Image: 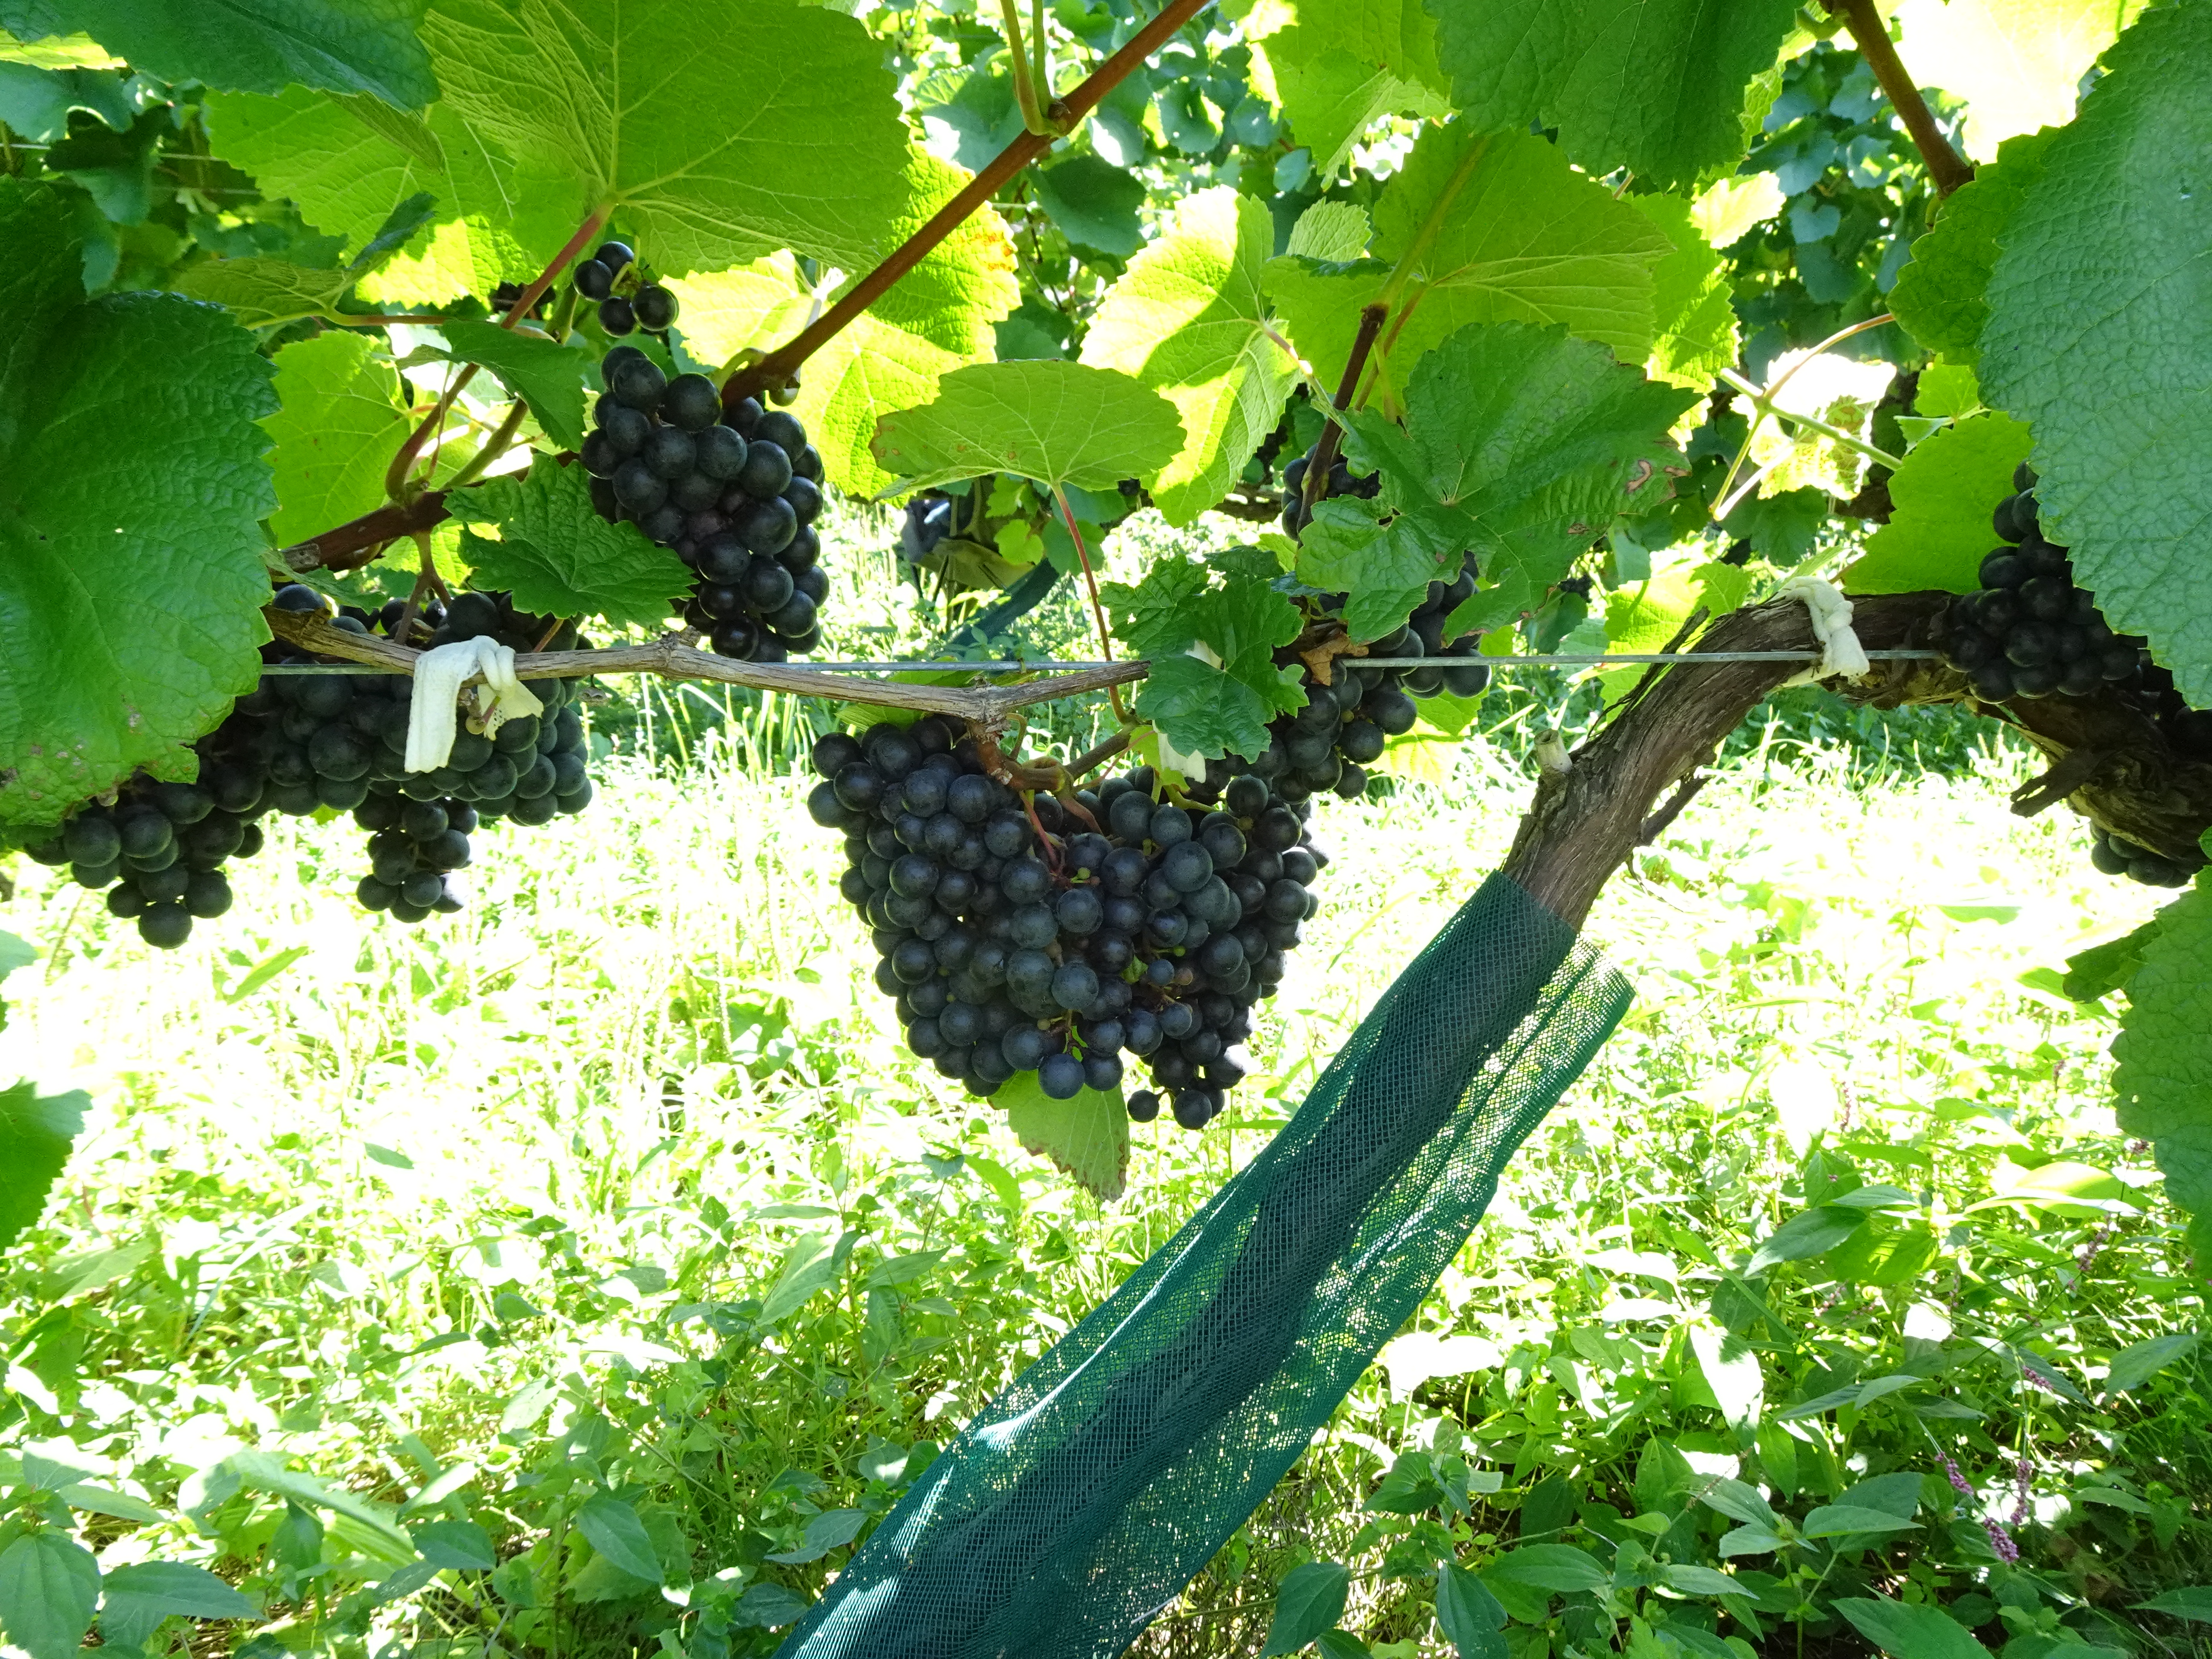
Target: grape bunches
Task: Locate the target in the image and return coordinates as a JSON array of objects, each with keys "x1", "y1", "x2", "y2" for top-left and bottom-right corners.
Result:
[
  {"x1": 1128, "y1": 775, "x2": 1329, "y2": 1128},
  {"x1": 1281, "y1": 443, "x2": 1382, "y2": 541},
  {"x1": 21, "y1": 732, "x2": 265, "y2": 948},
  {"x1": 1400, "y1": 548, "x2": 1490, "y2": 698},
  {"x1": 807, "y1": 712, "x2": 1033, "y2": 1097},
  {"x1": 2068, "y1": 648, "x2": 2212, "y2": 888},
  {"x1": 1941, "y1": 461, "x2": 2147, "y2": 703},
  {"x1": 573, "y1": 241, "x2": 679, "y2": 338},
  {"x1": 580, "y1": 346, "x2": 830, "y2": 662},
  {"x1": 1219, "y1": 592, "x2": 1425, "y2": 802},
  {"x1": 373, "y1": 592, "x2": 591, "y2": 826},
  {"x1": 1000, "y1": 758, "x2": 1251, "y2": 1098},
  {"x1": 226, "y1": 583, "x2": 400, "y2": 816},
  {"x1": 353, "y1": 789, "x2": 479, "y2": 923}
]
